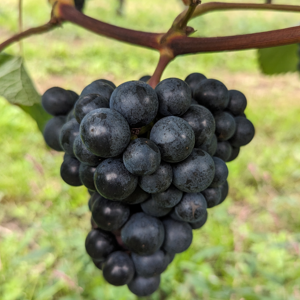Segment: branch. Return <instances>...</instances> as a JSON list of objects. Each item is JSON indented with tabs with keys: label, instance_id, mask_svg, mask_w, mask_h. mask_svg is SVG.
<instances>
[{
	"label": "branch",
	"instance_id": "1",
	"mask_svg": "<svg viewBox=\"0 0 300 300\" xmlns=\"http://www.w3.org/2000/svg\"><path fill=\"white\" fill-rule=\"evenodd\" d=\"M84 3L85 0H48L51 8L49 21L40 27H31L3 41L0 44V53L28 36L44 34L61 28L65 22L74 23L86 31L114 41L153 51L158 52L159 48L172 49L178 53V56L266 49L300 43V26L225 37H189L197 30H194L192 26H187L191 19L214 10L260 9L300 13V5L206 2L186 8L175 18L166 33H150L125 29L89 17L82 12Z\"/></svg>",
	"mask_w": 300,
	"mask_h": 300
}]
</instances>
